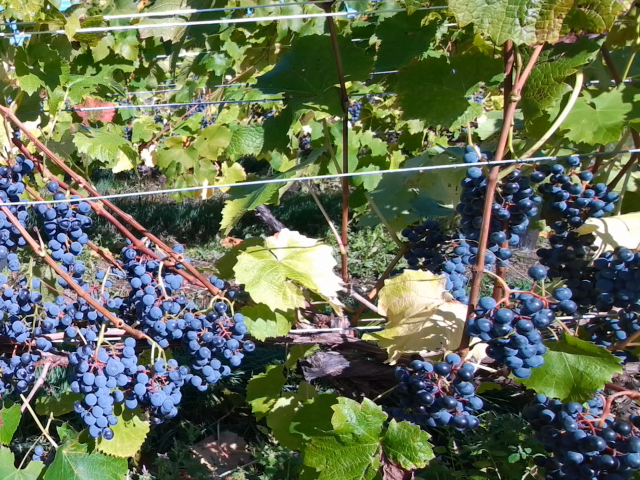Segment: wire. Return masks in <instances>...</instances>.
Segmentation results:
<instances>
[{
	"label": "wire",
	"instance_id": "d2f4af69",
	"mask_svg": "<svg viewBox=\"0 0 640 480\" xmlns=\"http://www.w3.org/2000/svg\"><path fill=\"white\" fill-rule=\"evenodd\" d=\"M566 158H570V155L565 154V155H560V156H535V157H526V158L512 159V160L481 161V163H478V162L463 163V164L447 163V164H444V165H442V164H432V167L431 166H425V167H414V168H391L390 170L383 169V170H380V171L358 170L357 172L335 173V174H327V175H321V176H304V177L290 178V179H265L263 181H256V182H234V184L209 185V186H206V187H191V188H177V189H162V190H157V191L130 192L128 194L112 195V196H110V195H99V196H96V197L74 199V200L58 199V200H49V201L0 203V206L54 205V203L55 204H68V203H77V202L99 200L101 198L114 199V198L130 197L132 195L159 194V193H164V192L208 190V189H212V188L241 187V186H259L260 184H266V183L293 182V181H300V180H306V179H323V178L338 177V176L382 175L383 173H409V172H413V171H417V170L428 171V170H438V169H443V168L451 169V168H456V167L491 166V165H497V164H501V163L530 162V161H537V160L566 159Z\"/></svg>",
	"mask_w": 640,
	"mask_h": 480
},
{
	"label": "wire",
	"instance_id": "a73af890",
	"mask_svg": "<svg viewBox=\"0 0 640 480\" xmlns=\"http://www.w3.org/2000/svg\"><path fill=\"white\" fill-rule=\"evenodd\" d=\"M406 11L405 7L401 8H391V9H348L343 11H331L326 13H318V14H299V13H289L285 15H277V16H258L251 18H222V19H207V20H186L179 22H168V23H153V24H130L126 26H91V27H83L77 28L76 32L79 34H88L93 33L94 31H122V32H130L134 29H156V28H167V29H175L176 27L181 26H202L209 24H224V23H253L260 21H279V20H288L292 18L297 19H309V20H317L321 18H328L329 16H345L350 14H393V13H403Z\"/></svg>",
	"mask_w": 640,
	"mask_h": 480
},
{
	"label": "wire",
	"instance_id": "4f2155b8",
	"mask_svg": "<svg viewBox=\"0 0 640 480\" xmlns=\"http://www.w3.org/2000/svg\"><path fill=\"white\" fill-rule=\"evenodd\" d=\"M332 0H310V1H289L282 3H263V4H243L235 6H224L218 8H203L196 10H174V11H158V12H141V13H129L122 15L105 14V19L112 20H125L131 18H143V17H161V16H176V15H198L205 13H220L226 11H237L246 9H265V8H284L291 6H313L319 4H328Z\"/></svg>",
	"mask_w": 640,
	"mask_h": 480
},
{
	"label": "wire",
	"instance_id": "f0478fcc",
	"mask_svg": "<svg viewBox=\"0 0 640 480\" xmlns=\"http://www.w3.org/2000/svg\"><path fill=\"white\" fill-rule=\"evenodd\" d=\"M369 330H383V326L380 327H367V326H358V327H327V328H312V329H300L294 328L290 329L289 333H326V332H338V331H369Z\"/></svg>",
	"mask_w": 640,
	"mask_h": 480
},
{
	"label": "wire",
	"instance_id": "a009ed1b",
	"mask_svg": "<svg viewBox=\"0 0 640 480\" xmlns=\"http://www.w3.org/2000/svg\"><path fill=\"white\" fill-rule=\"evenodd\" d=\"M604 318H613L617 319L618 315L615 313H602V314H587V315H564L557 316V321L564 322H576L577 320H589V319H604Z\"/></svg>",
	"mask_w": 640,
	"mask_h": 480
},
{
	"label": "wire",
	"instance_id": "34cfc8c6",
	"mask_svg": "<svg viewBox=\"0 0 640 480\" xmlns=\"http://www.w3.org/2000/svg\"><path fill=\"white\" fill-rule=\"evenodd\" d=\"M64 29H48V30H34L26 32H0V37H18L24 38L36 35H50V34H64Z\"/></svg>",
	"mask_w": 640,
	"mask_h": 480
},
{
	"label": "wire",
	"instance_id": "f1345edc",
	"mask_svg": "<svg viewBox=\"0 0 640 480\" xmlns=\"http://www.w3.org/2000/svg\"><path fill=\"white\" fill-rule=\"evenodd\" d=\"M640 152V148L633 150H619V151H601V152H588L578 153V156H590V155H604V154H621V153H635Z\"/></svg>",
	"mask_w": 640,
	"mask_h": 480
}]
</instances>
